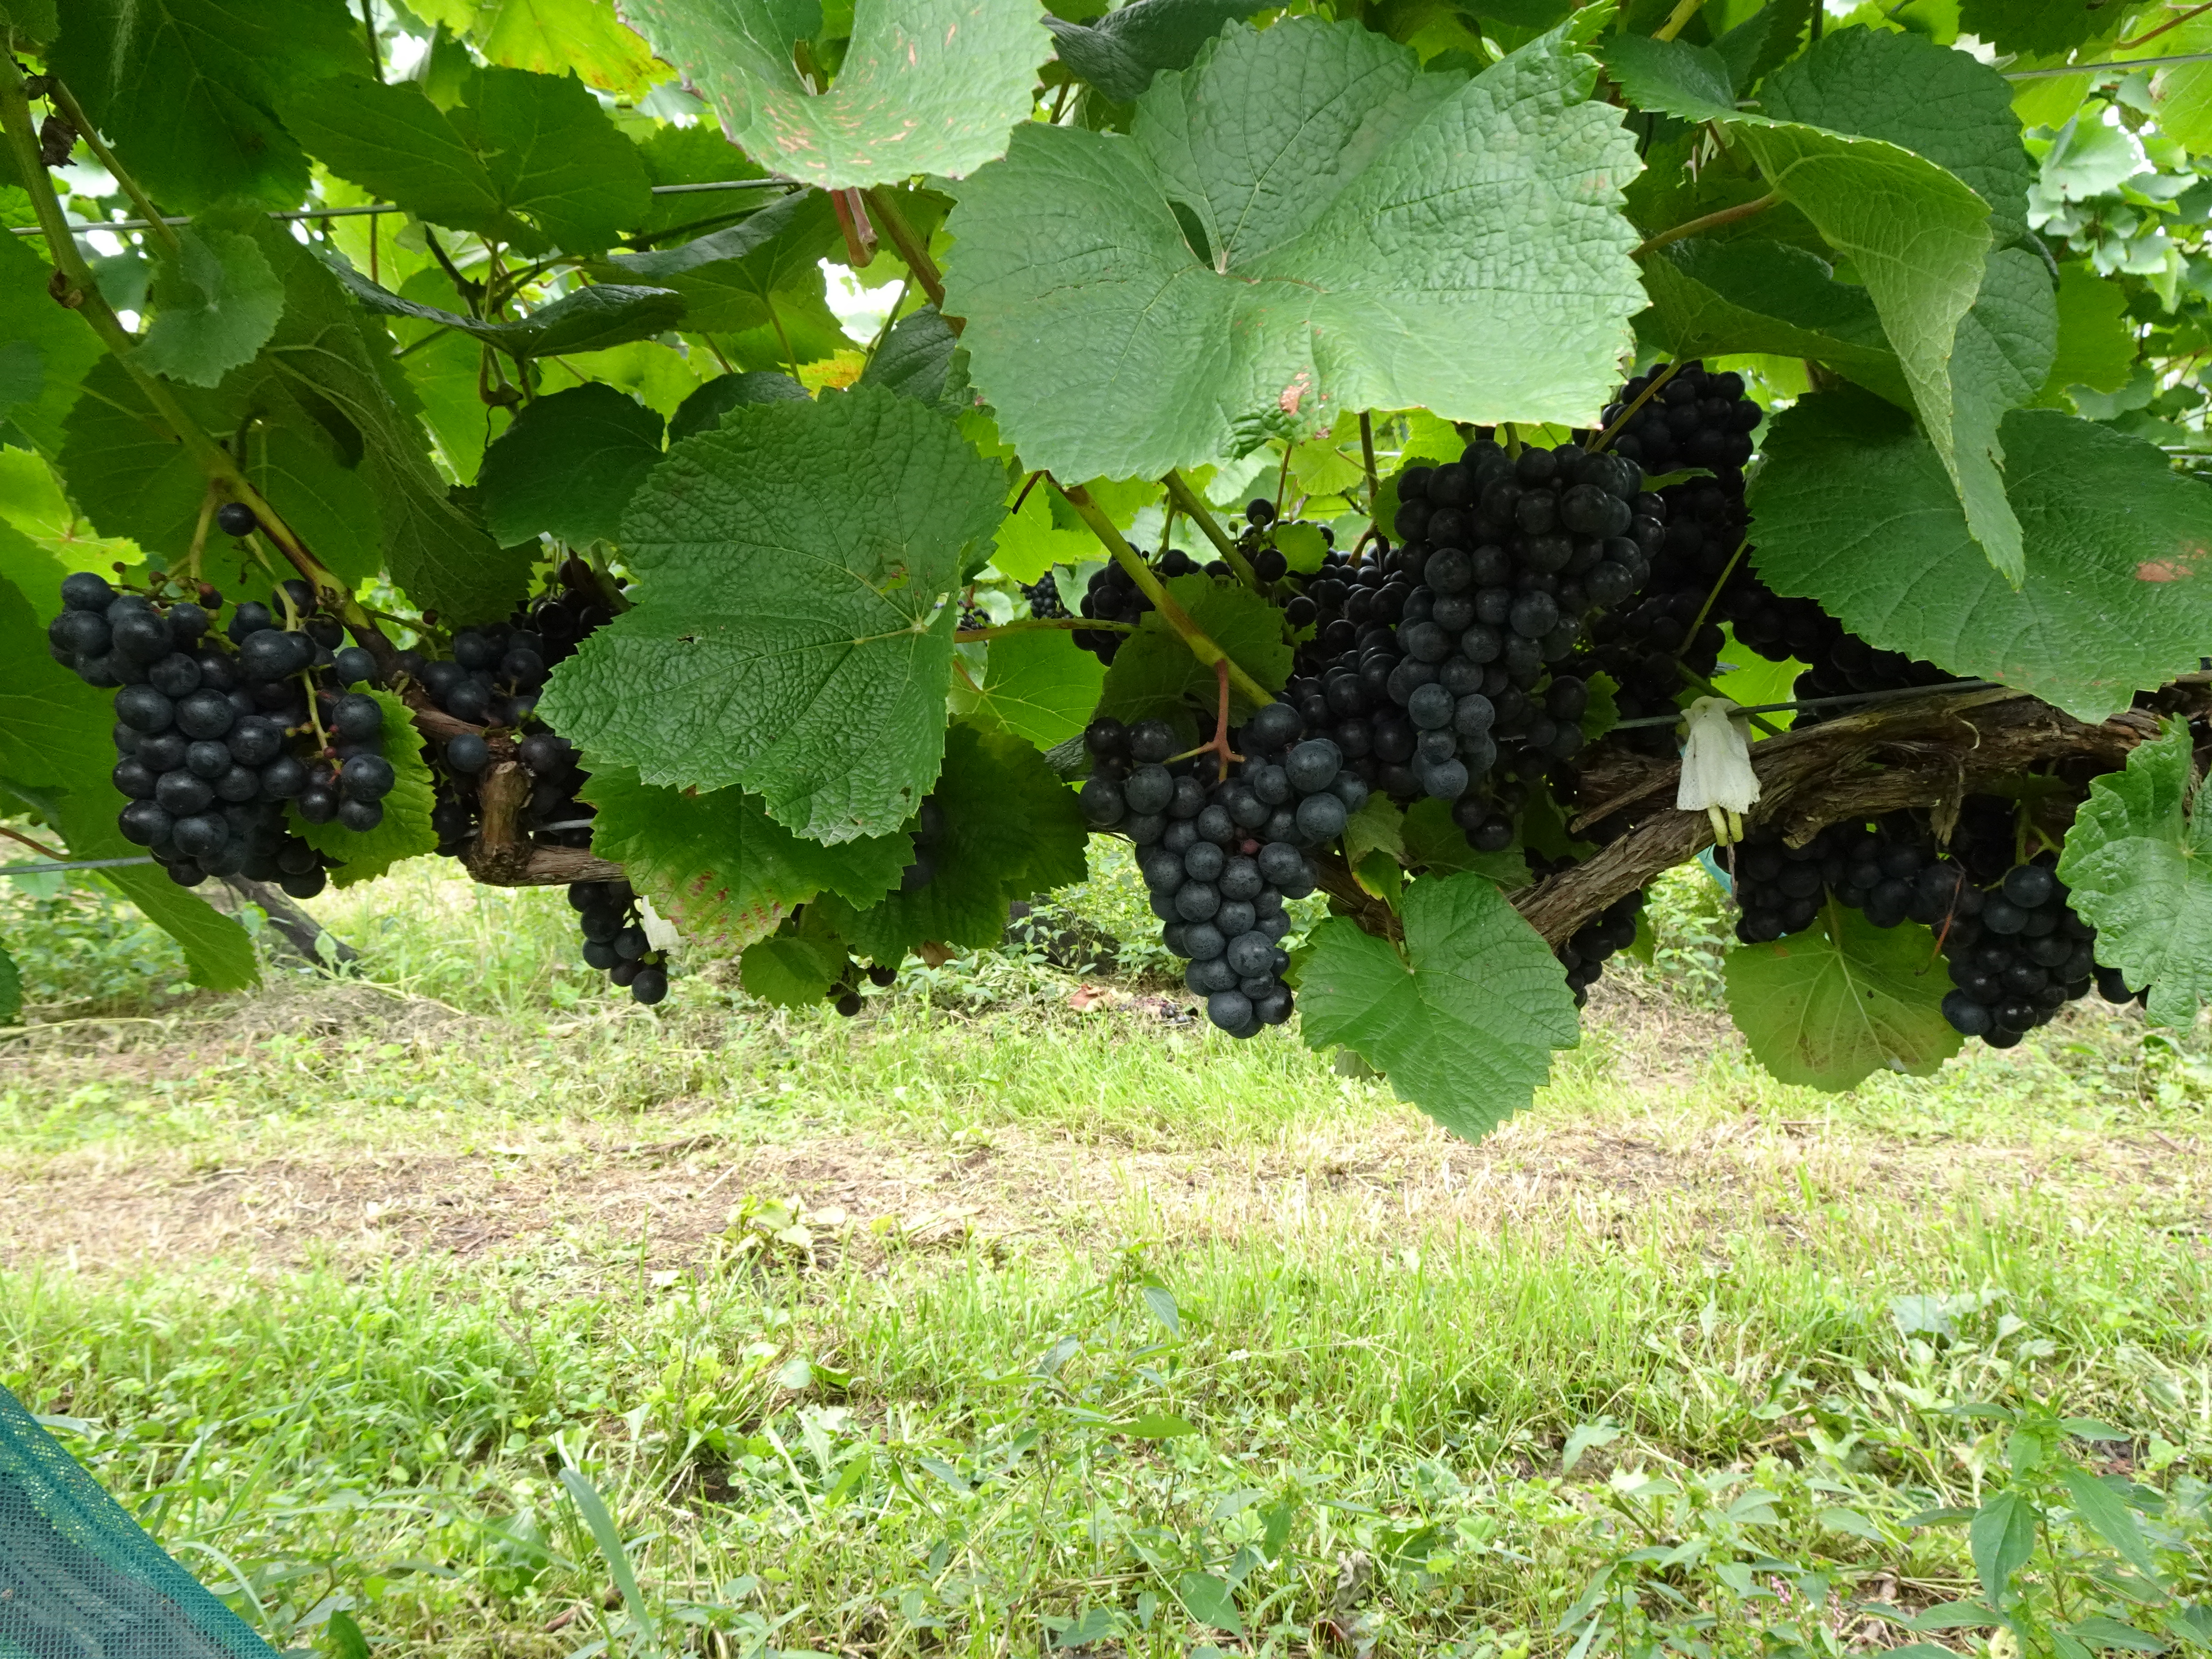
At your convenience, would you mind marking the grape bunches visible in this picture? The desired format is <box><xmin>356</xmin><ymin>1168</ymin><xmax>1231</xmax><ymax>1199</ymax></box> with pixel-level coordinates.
<box><xmin>1020</xmin><ymin>569</ymin><xmax>1070</xmax><ymax>620</ymax></box>
<box><xmin>219</xmin><ymin>502</ymin><xmax>256</xmax><ymax>538</ymax></box>
<box><xmin>511</xmin><ymin>559</ymin><xmax>638</xmax><ymax>664</ymax></box>
<box><xmin>47</xmin><ymin>573</ymin><xmax>258</xmax><ymax>887</ymax></box>
<box><xmin>789</xmin><ymin>902</ymin><xmax>897</xmax><ymax>1017</ymax></box>
<box><xmin>889</xmin><ymin>798</ymin><xmax>943</xmax><ymax>892</ymax></box>
<box><xmin>1716</xmin><ymin>544</ymin><xmax>1982</xmax><ymax>686</ymax></box>
<box><xmin>1244</xmin><ymin>497</ymin><xmax>1405</xmax><ymax>631</ymax></box>
<box><xmin>1080</xmin><ymin>702</ymin><xmax>1369</xmax><ymax>1038</ymax></box>
<box><xmin>2093</xmin><ymin>962</ymin><xmax>2155</xmax><ymax>1010</ymax></box>
<box><xmin>1573</xmin><ymin>359</ymin><xmax>1762</xmax><ymax>575</ymax></box>
<box><xmin>229</xmin><ymin>581</ymin><xmax>396</xmax><ymax>832</ymax></box>
<box><xmin>535</xmin><ymin>806</ymin><xmax>667</xmax><ymax>1004</ymax></box>
<box><xmin>1528</xmin><ymin>814</ymin><xmax>1644</xmax><ymax>1010</ymax></box>
<box><xmin>242</xmin><ymin>799</ymin><xmax>343</xmax><ymax>898</ymax></box>
<box><xmin>1072</xmin><ymin>543</ymin><xmax>1242</xmax><ymax>669</ymax></box>
<box><xmin>1452</xmin><ymin>676</ymin><xmax>1587</xmax><ymax>853</ymax></box>
<box><xmin>1379</xmin><ymin>439</ymin><xmax>1664</xmax><ymax>801</ymax></box>
<box><xmin>418</xmin><ymin>728</ymin><xmax>485</xmax><ymax>858</ymax></box>
<box><xmin>1789</xmin><ymin>663</ymin><xmax>1980</xmax><ymax>926</ymax></box>
<box><xmin>399</xmin><ymin>612</ymin><xmax>580</xmax><ymax>818</ymax></box>
<box><xmin>1289</xmin><ymin>618</ymin><xmax>1427</xmax><ymax>805</ymax></box>
<box><xmin>1922</xmin><ymin>838</ymin><xmax>2097</xmax><ymax>1047</ymax></box>
<box><xmin>1713</xmin><ymin>807</ymin><xmax>1834</xmax><ymax>944</ymax></box>
<box><xmin>1579</xmin><ymin>584</ymin><xmax>1726</xmax><ymax>755</ymax></box>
